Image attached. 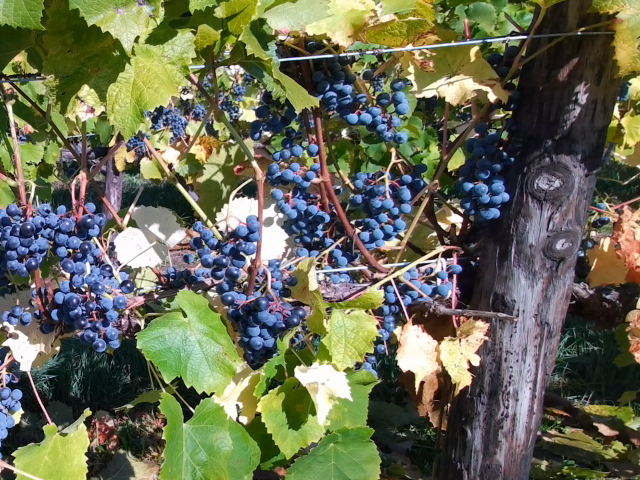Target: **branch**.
Instances as JSON below:
<instances>
[{
    "mask_svg": "<svg viewBox=\"0 0 640 480\" xmlns=\"http://www.w3.org/2000/svg\"><path fill=\"white\" fill-rule=\"evenodd\" d=\"M136 140L149 152L152 156L157 160V162L161 165L164 172L167 174L169 181L174 185L176 190L183 196V198L187 201V203L192 207V209L199 215L201 219L205 221V224L208 226L211 234L218 240L223 238V235L218 231L216 225L212 222L210 216L200 208V206L195 202V200L191 197L189 192L183 187V185L176 178L173 170L169 166V164L164 160V157L151 145V142L146 134L143 132H138L136 134Z\"/></svg>",
    "mask_w": 640,
    "mask_h": 480,
    "instance_id": "obj_4",
    "label": "branch"
},
{
    "mask_svg": "<svg viewBox=\"0 0 640 480\" xmlns=\"http://www.w3.org/2000/svg\"><path fill=\"white\" fill-rule=\"evenodd\" d=\"M34 277V293H35V302L37 309L41 312L44 317H48L50 312L43 304L42 300V290H41V274L38 270L33 272Z\"/></svg>",
    "mask_w": 640,
    "mask_h": 480,
    "instance_id": "obj_8",
    "label": "branch"
},
{
    "mask_svg": "<svg viewBox=\"0 0 640 480\" xmlns=\"http://www.w3.org/2000/svg\"><path fill=\"white\" fill-rule=\"evenodd\" d=\"M4 106L7 109V116L12 138V160L14 163V170L17 173V192L19 196V202L22 205L27 203L26 193L24 189V170L21 167V161L19 157V135L16 124L14 106L11 104V99L6 97L4 99Z\"/></svg>",
    "mask_w": 640,
    "mask_h": 480,
    "instance_id": "obj_5",
    "label": "branch"
},
{
    "mask_svg": "<svg viewBox=\"0 0 640 480\" xmlns=\"http://www.w3.org/2000/svg\"><path fill=\"white\" fill-rule=\"evenodd\" d=\"M86 137H87V123L83 122L81 124V159H80V170H79L81 175V181L78 186L79 200L77 202V216L79 218H82L84 216V205L86 203L85 189L88 183V173L86 169V151H87Z\"/></svg>",
    "mask_w": 640,
    "mask_h": 480,
    "instance_id": "obj_6",
    "label": "branch"
},
{
    "mask_svg": "<svg viewBox=\"0 0 640 480\" xmlns=\"http://www.w3.org/2000/svg\"><path fill=\"white\" fill-rule=\"evenodd\" d=\"M529 43H530L529 39L522 40L521 47L515 52V55L508 66L507 75L505 76L504 80L501 82V85L503 87H507L511 83V80L515 74V68L517 67V64L519 63L522 55L528 50Z\"/></svg>",
    "mask_w": 640,
    "mask_h": 480,
    "instance_id": "obj_7",
    "label": "branch"
},
{
    "mask_svg": "<svg viewBox=\"0 0 640 480\" xmlns=\"http://www.w3.org/2000/svg\"><path fill=\"white\" fill-rule=\"evenodd\" d=\"M312 123H313L314 130L316 132L317 144H318V149H319V157L321 159V179H322V182H323V187H324V189H325V191H326V193L328 195V198L330 199V201H331V203L333 205V208L335 209L337 218L340 221V223L344 226V228L354 238V241L357 244L358 248L361 250L365 261L372 268H376V269L380 270L384 275H388L390 273V270L388 268H386L379 261L373 260V258L371 257V254L369 252V249L364 244L361 236L356 231V229L349 223V221L345 218L344 212L342 210V207L340 206L339 200L335 196V193H334V191H333V189L331 187L330 180H329V177H328V157L326 155V146H325V142H324L323 129H322L321 125H320L319 107L317 105H314L312 107Z\"/></svg>",
    "mask_w": 640,
    "mask_h": 480,
    "instance_id": "obj_3",
    "label": "branch"
},
{
    "mask_svg": "<svg viewBox=\"0 0 640 480\" xmlns=\"http://www.w3.org/2000/svg\"><path fill=\"white\" fill-rule=\"evenodd\" d=\"M544 19H545V11L543 9H540L530 23L529 32L531 34H535L537 32V26L539 22H542Z\"/></svg>",
    "mask_w": 640,
    "mask_h": 480,
    "instance_id": "obj_11",
    "label": "branch"
},
{
    "mask_svg": "<svg viewBox=\"0 0 640 480\" xmlns=\"http://www.w3.org/2000/svg\"><path fill=\"white\" fill-rule=\"evenodd\" d=\"M493 105H494V102L492 100L485 101L482 104V106L480 107V109L477 111V113L468 122L466 127L458 134L456 139L444 151V153L441 156L439 162L435 166L433 175L431 176V179L428 182V188L426 189V191L424 192V194H423V196H422V198L420 200V203H419V206H418V209H417L416 213L410 219V222H409L407 228L404 230L403 238L401 239L400 243L398 244V246L396 248V252L393 255V258H392L393 262H399L400 261V258L403 255V251H404L405 247L407 246V243L410 241V236H411L412 231L414 230L418 220L422 217L423 213L425 212L426 205H427V202L430 199V196L435 193V184L438 182V179H439V177L441 175L442 169L446 165V162L449 159L450 155L461 144V142L464 140V138L467 136V134H469L471 132V130L473 129L475 124L482 118V116L486 113L488 108L492 107Z\"/></svg>",
    "mask_w": 640,
    "mask_h": 480,
    "instance_id": "obj_2",
    "label": "branch"
},
{
    "mask_svg": "<svg viewBox=\"0 0 640 480\" xmlns=\"http://www.w3.org/2000/svg\"><path fill=\"white\" fill-rule=\"evenodd\" d=\"M300 69L302 71L307 89L311 92H314L316 90V87L314 86L311 74L309 72L307 61H300Z\"/></svg>",
    "mask_w": 640,
    "mask_h": 480,
    "instance_id": "obj_10",
    "label": "branch"
},
{
    "mask_svg": "<svg viewBox=\"0 0 640 480\" xmlns=\"http://www.w3.org/2000/svg\"><path fill=\"white\" fill-rule=\"evenodd\" d=\"M386 147L390 150V152L392 154V157L394 158V160H395V162H396V164H397V166H398V168L400 170V173L402 175H406L408 173V170H407L406 165L403 162V160H402V158H401L396 146L392 142H388L386 144Z\"/></svg>",
    "mask_w": 640,
    "mask_h": 480,
    "instance_id": "obj_9",
    "label": "branch"
},
{
    "mask_svg": "<svg viewBox=\"0 0 640 480\" xmlns=\"http://www.w3.org/2000/svg\"><path fill=\"white\" fill-rule=\"evenodd\" d=\"M185 78L187 80H189L195 86V88L198 90V92L202 95V97L208 102V104L214 110V112L216 113V115L218 116L220 121L231 132L232 136L235 139H237L241 149L243 150L244 154L246 155V158L253 165L254 176L257 178V183H258L257 184V190H258L257 212H258V221L260 222V229L258 231H259V233H261V239H259V241H257L255 243L257 251L255 252L254 264L252 266V269H250V267L248 265H245L243 267V270H244V272L246 274L250 273L248 284H247L246 294L248 296H252L254 294V287H255V283H256V277H257V273H258V271H259V269L261 267V259H262L263 206H264V189H263L264 172H263V168L261 167L260 163L257 161V158L251 152L249 146L247 145V142H246L245 138L238 132L236 127L226 117V115L224 114L222 109L215 102L214 98L208 93V91L197 80V78L191 73H187L185 75Z\"/></svg>",
    "mask_w": 640,
    "mask_h": 480,
    "instance_id": "obj_1",
    "label": "branch"
}]
</instances>
